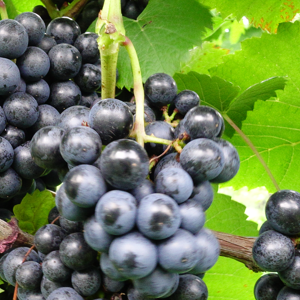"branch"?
I'll use <instances>...</instances> for the list:
<instances>
[{
  "mask_svg": "<svg viewBox=\"0 0 300 300\" xmlns=\"http://www.w3.org/2000/svg\"><path fill=\"white\" fill-rule=\"evenodd\" d=\"M94 32L101 60V98H115L118 52L126 37L120 0H103Z\"/></svg>",
  "mask_w": 300,
  "mask_h": 300,
  "instance_id": "branch-1",
  "label": "branch"
},
{
  "mask_svg": "<svg viewBox=\"0 0 300 300\" xmlns=\"http://www.w3.org/2000/svg\"><path fill=\"white\" fill-rule=\"evenodd\" d=\"M219 239L220 257H227L236 260L252 270L254 273L263 271L259 268L252 257V246L258 237H248L220 233L212 230Z\"/></svg>",
  "mask_w": 300,
  "mask_h": 300,
  "instance_id": "branch-2",
  "label": "branch"
},
{
  "mask_svg": "<svg viewBox=\"0 0 300 300\" xmlns=\"http://www.w3.org/2000/svg\"><path fill=\"white\" fill-rule=\"evenodd\" d=\"M14 247H34V237L20 230L16 218L7 223L0 220V259Z\"/></svg>",
  "mask_w": 300,
  "mask_h": 300,
  "instance_id": "branch-3",
  "label": "branch"
}]
</instances>
